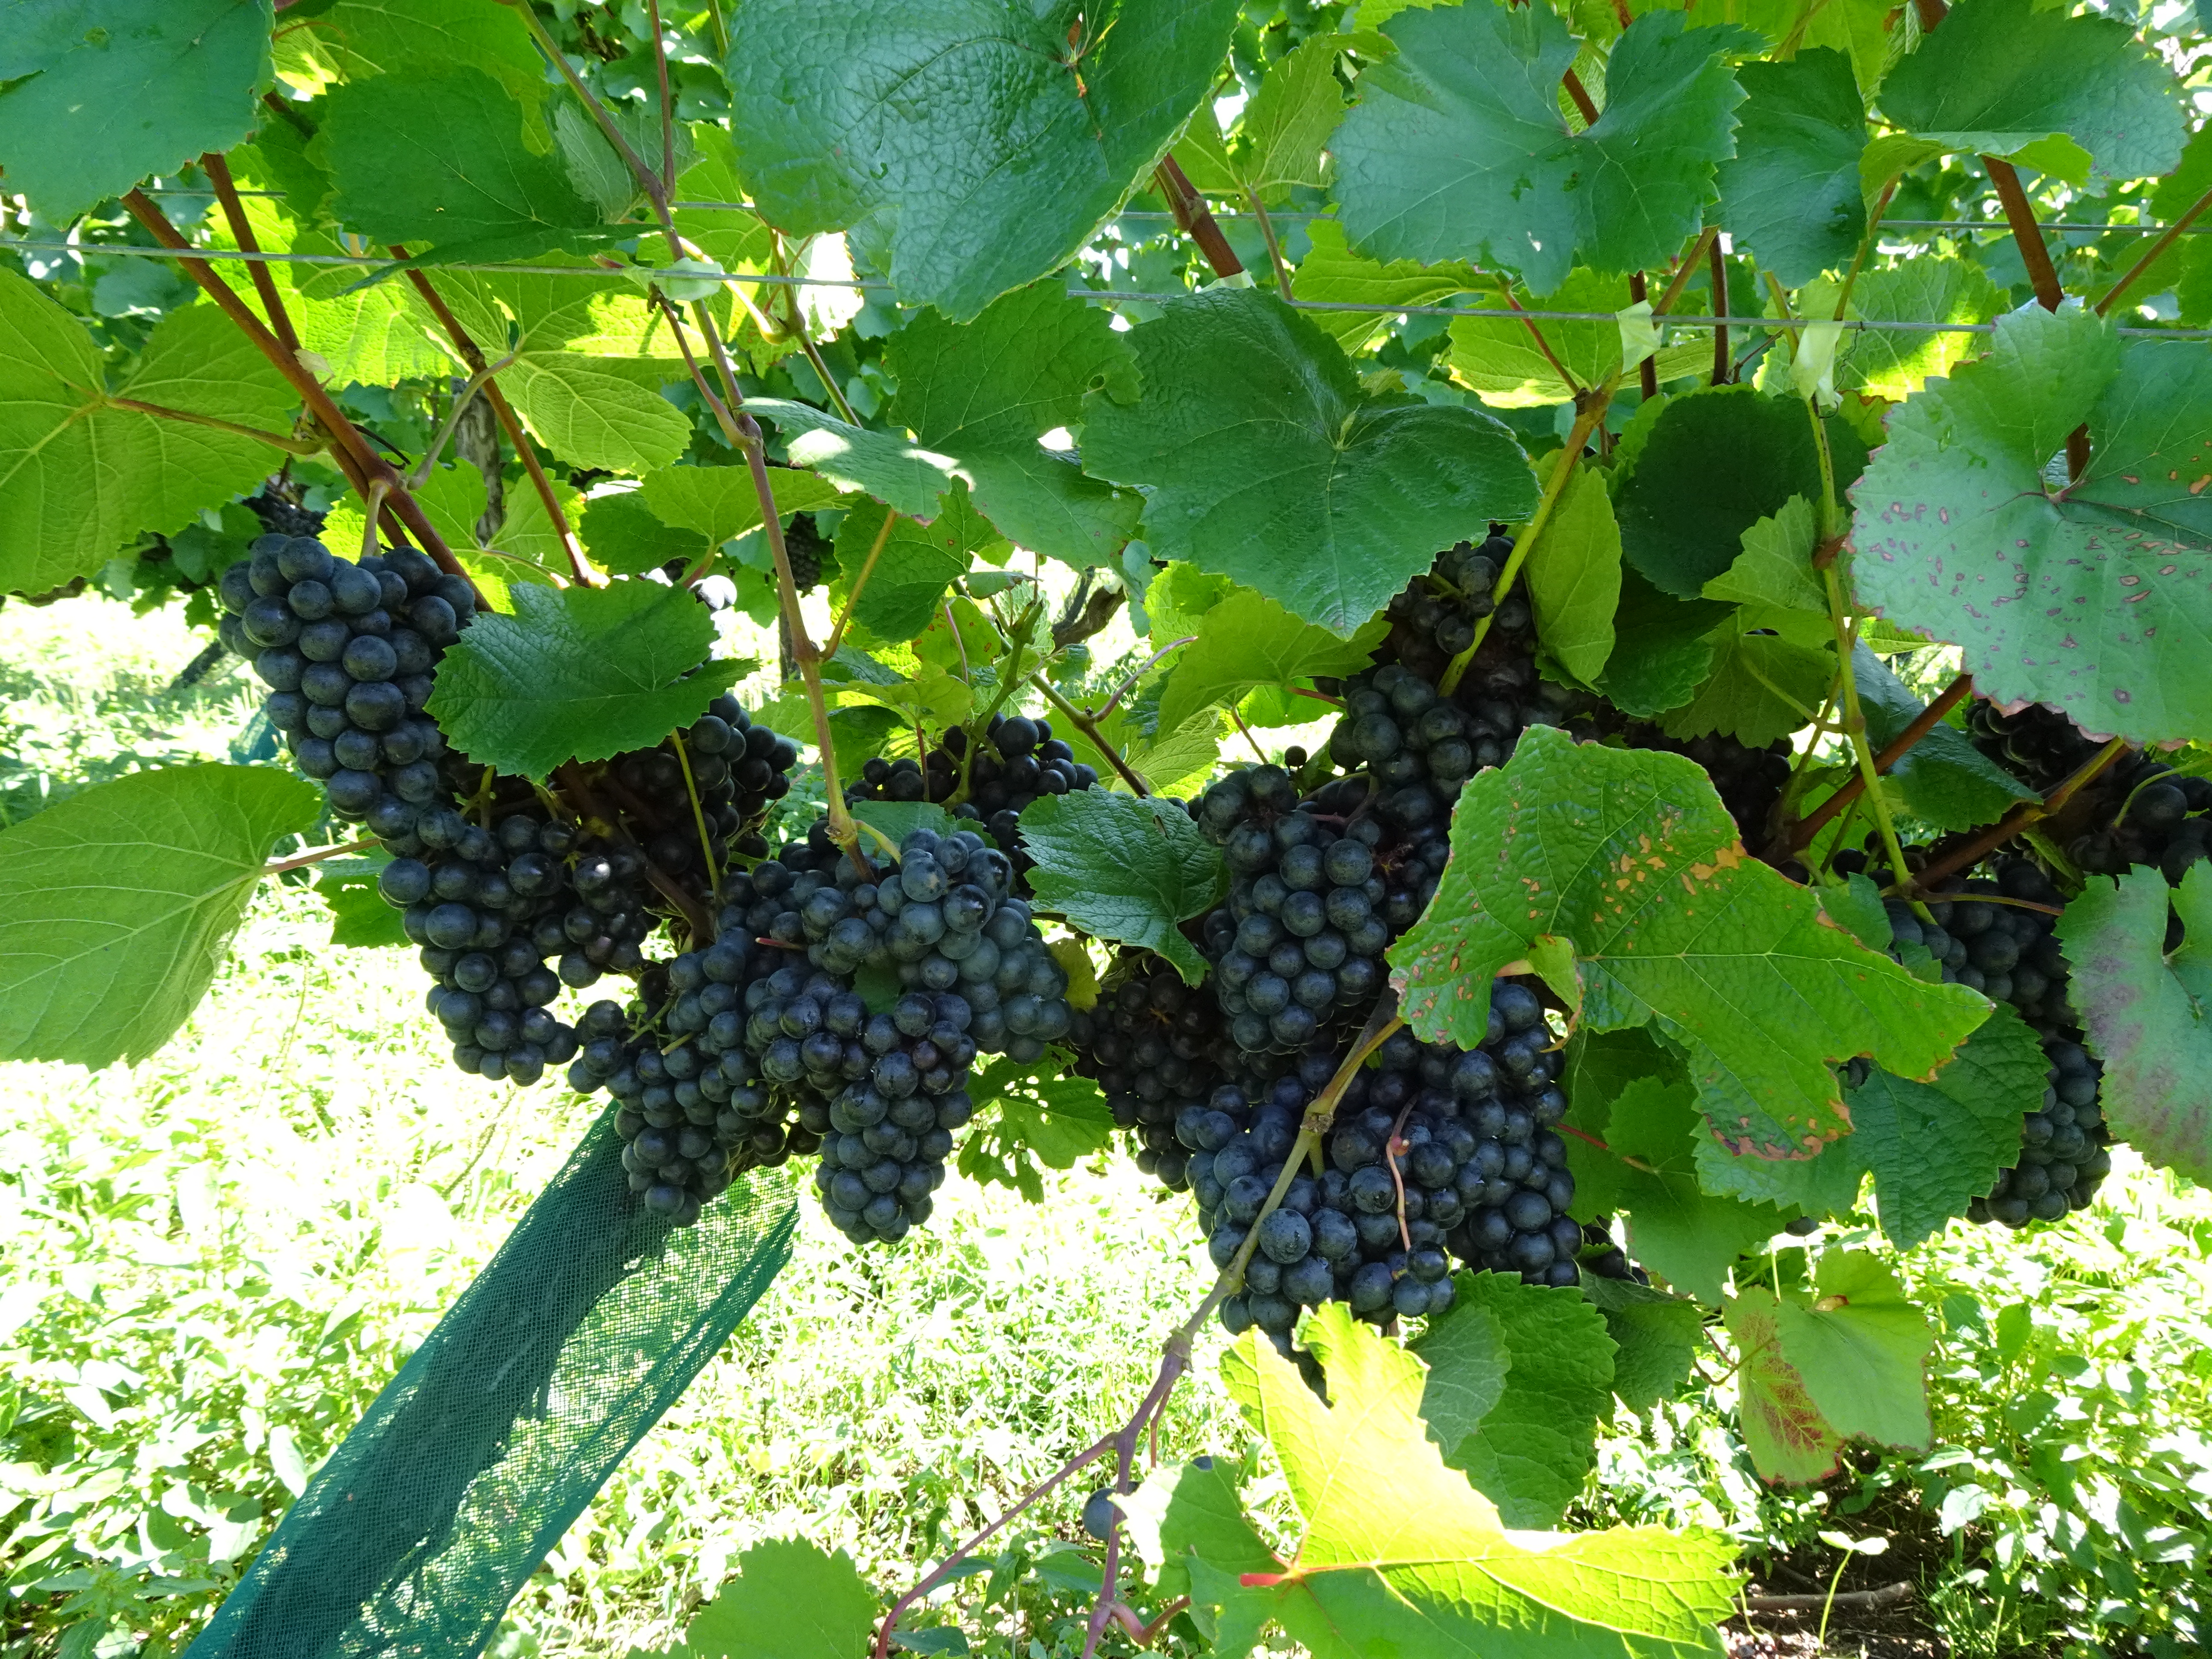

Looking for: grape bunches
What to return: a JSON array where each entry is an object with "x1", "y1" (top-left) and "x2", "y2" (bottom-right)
[
  {"x1": 1924, "y1": 861, "x2": 2088, "y2": 1024},
  {"x1": 1370, "y1": 981, "x2": 1583, "y2": 1288},
  {"x1": 1784, "y1": 1216, "x2": 1819, "y2": 1236},
  {"x1": 619, "y1": 692, "x2": 797, "y2": 910},
  {"x1": 747, "y1": 966, "x2": 978, "y2": 1245},
  {"x1": 1175, "y1": 1077, "x2": 1358, "y2": 1362},
  {"x1": 1197, "y1": 746, "x2": 1450, "y2": 1059},
  {"x1": 531, "y1": 839, "x2": 661, "y2": 988},
  {"x1": 663, "y1": 942, "x2": 776, "y2": 1139},
  {"x1": 796, "y1": 828, "x2": 1075, "y2": 1066},
  {"x1": 2063, "y1": 764, "x2": 2212, "y2": 951},
  {"x1": 1965, "y1": 1045, "x2": 2111, "y2": 1229},
  {"x1": 1886, "y1": 915, "x2": 2012, "y2": 1003},
  {"x1": 1837, "y1": 1057, "x2": 1871, "y2": 1093},
  {"x1": 1318, "y1": 1108, "x2": 1489, "y2": 1325},
  {"x1": 379, "y1": 802, "x2": 579, "y2": 1085},
  {"x1": 1963, "y1": 696, "x2": 2145, "y2": 855},
  {"x1": 1831, "y1": 827, "x2": 1972, "y2": 892},
  {"x1": 1388, "y1": 521, "x2": 1532, "y2": 674},
  {"x1": 1329, "y1": 664, "x2": 1603, "y2": 830},
  {"x1": 1210, "y1": 1008, "x2": 1359, "y2": 1090},
  {"x1": 1166, "y1": 797, "x2": 1204, "y2": 822},
  {"x1": 568, "y1": 969, "x2": 826, "y2": 1228},
  {"x1": 778, "y1": 757, "x2": 922, "y2": 882},
  {"x1": 1306, "y1": 637, "x2": 1399, "y2": 698},
  {"x1": 1065, "y1": 946, "x2": 1226, "y2": 1192},
  {"x1": 1583, "y1": 1215, "x2": 1651, "y2": 1287},
  {"x1": 924, "y1": 711, "x2": 1099, "y2": 902},
  {"x1": 1735, "y1": 719, "x2": 1793, "y2": 857},
  {"x1": 442, "y1": 750, "x2": 551, "y2": 831},
  {"x1": 220, "y1": 532, "x2": 476, "y2": 861},
  {"x1": 710, "y1": 861, "x2": 824, "y2": 976}
]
